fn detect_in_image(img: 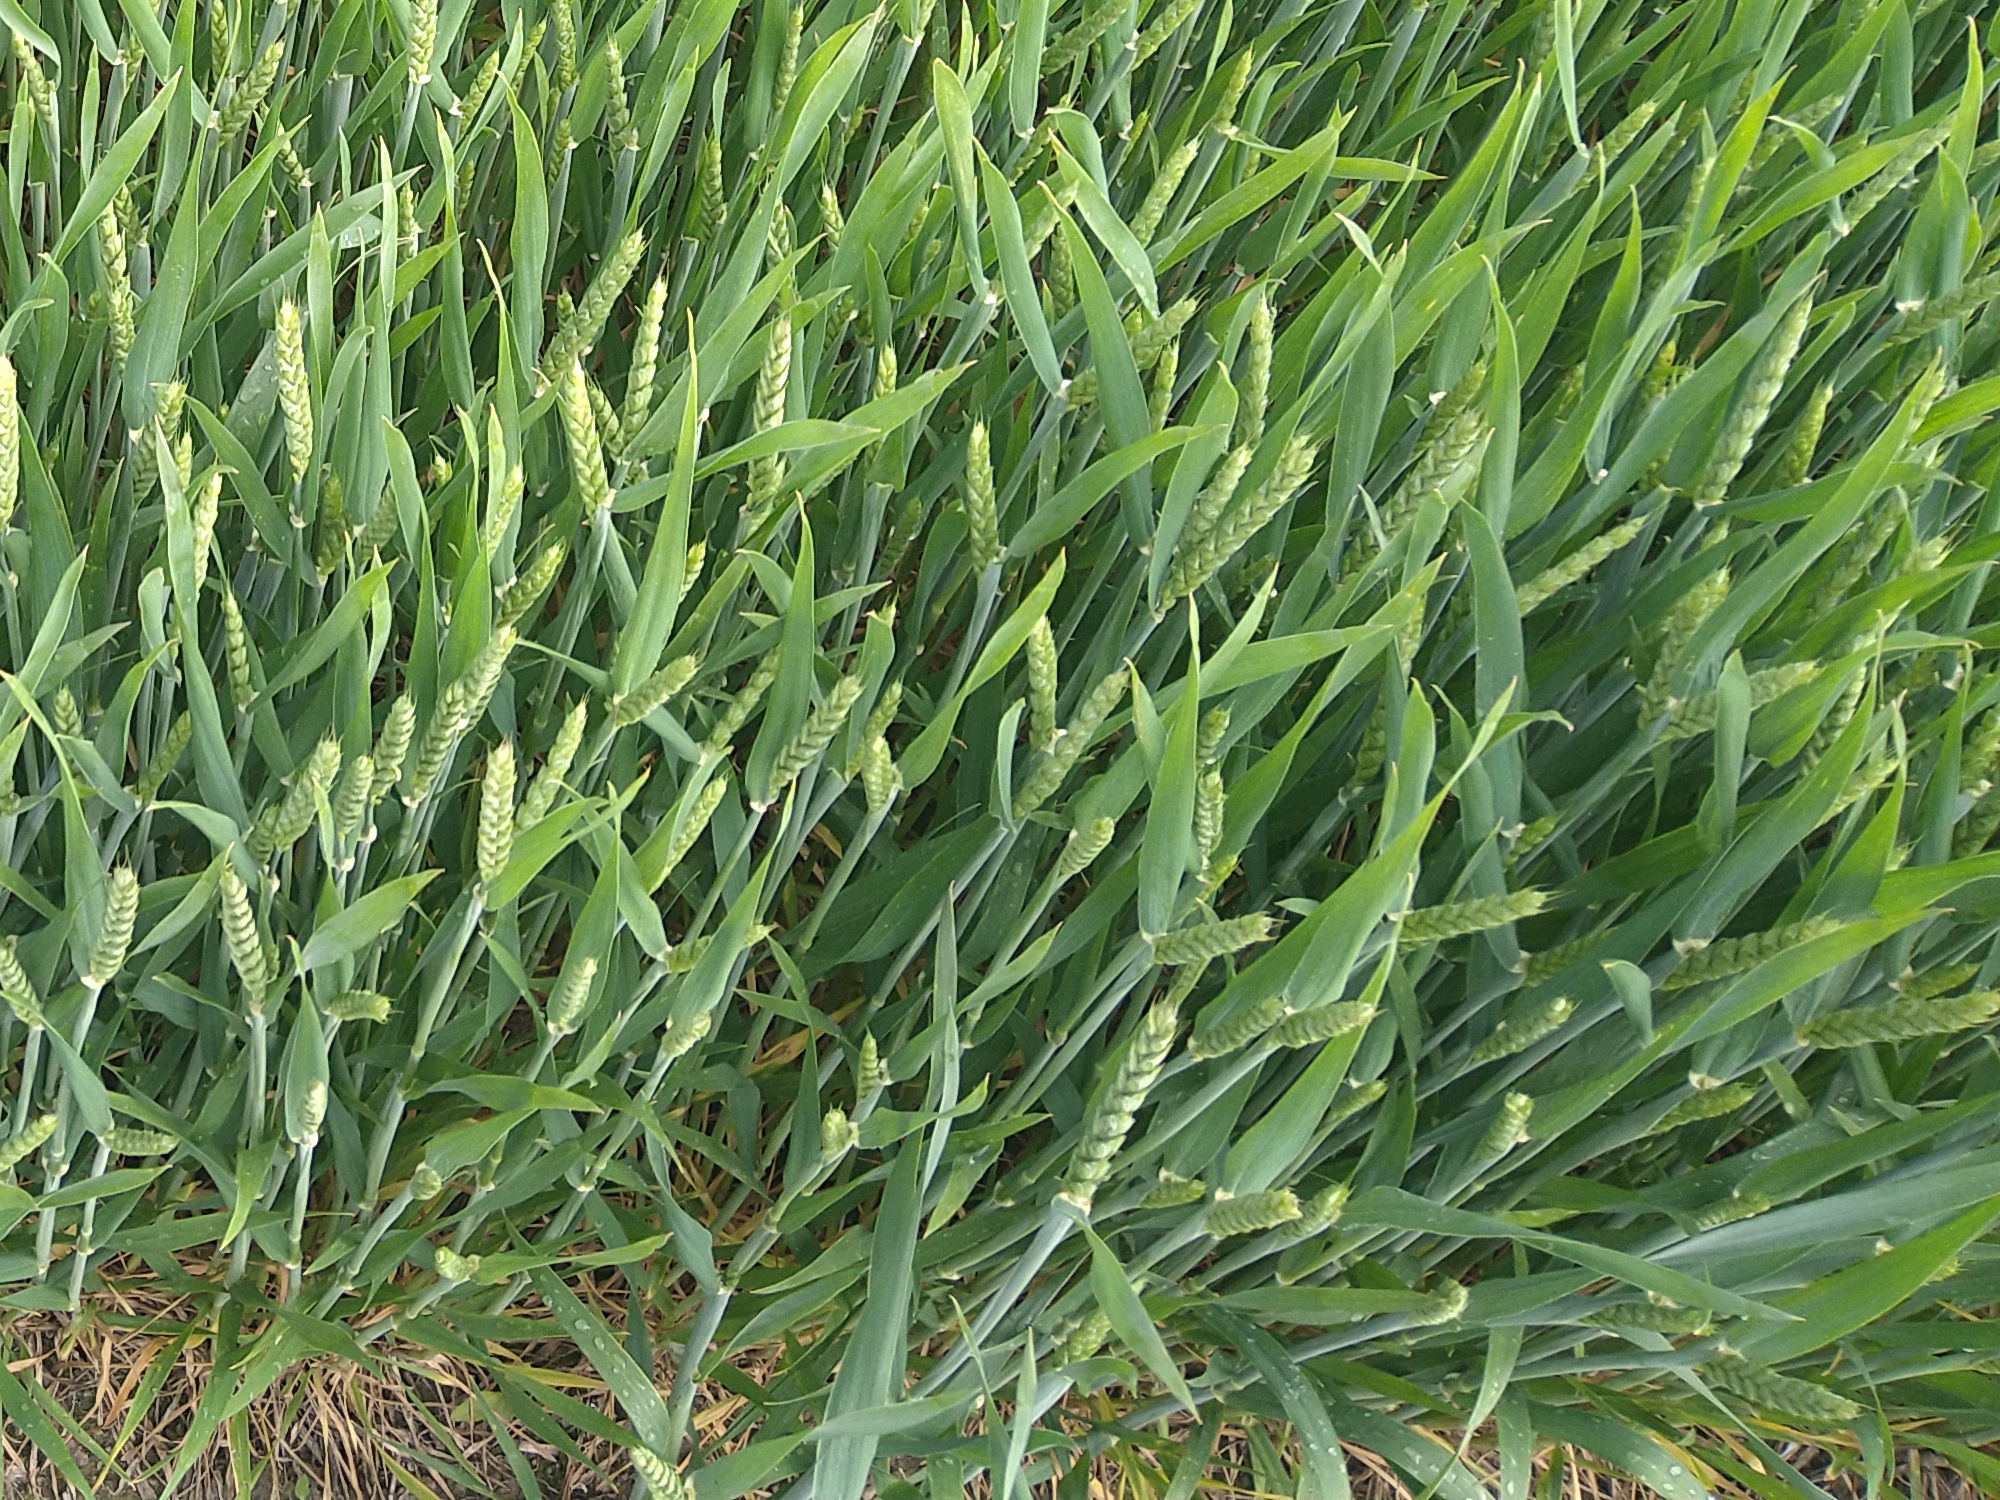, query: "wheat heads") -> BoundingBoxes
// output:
[244,801,282,870]
[817,187,838,247]
[1208,1189,1290,1233]
[193,474,219,604]
[0,1118,60,1195]
[750,324,787,508]
[206,0,226,76]
[97,190,124,285]
[258,210,275,311]
[209,38,282,139]
[876,339,896,404]
[1749,403,1825,504]
[1514,520,1643,617]
[1036,0,1132,72]
[683,143,727,261]
[98,1124,177,1160]
[1151,916,1278,957]
[275,304,311,468]
[257,104,310,183]
[453,155,474,222]
[661,781,725,877]
[142,712,190,792]
[1143,346,1179,429]
[451,48,498,140]
[559,362,606,517]
[1819,439,1939,610]
[1130,0,1220,60]
[1587,1304,1708,1334]
[477,749,514,877]
[1555,353,1594,416]
[820,1110,844,1150]
[540,0,578,91]
[326,763,369,833]
[1438,571,1476,646]
[409,0,439,79]
[1828,131,1943,244]
[8,26,51,127]
[1470,994,1571,1073]
[97,867,140,984]
[1059,1007,1176,1208]
[1419,353,1485,448]
[1695,1202,1762,1230]
[1027,188,1078,254]
[1679,292,1812,499]
[222,598,251,708]
[1807,985,2000,1042]
[1686,1350,1856,1415]
[129,385,184,496]
[0,949,45,1023]
[1185,705,1229,773]
[1216,53,1252,133]
[1580,104,1659,197]
[1355,890,1542,951]
[772,677,863,789]
[1333,406,1465,584]
[509,3,546,91]
[1653,164,1711,289]
[314,468,350,568]
[1644,1080,1752,1135]
[549,949,597,1020]
[1587,337,1676,457]
[1654,664,1819,746]
[549,115,575,185]
[1742,98,1842,171]
[1131,142,1198,247]
[757,194,795,269]
[1042,1310,1111,1369]
[619,655,701,724]
[1790,667,1866,775]
[396,684,472,801]
[1194,997,1280,1052]
[1062,302,1195,396]
[1465,1096,1530,1188]
[304,1070,323,1143]
[1492,810,1556,878]
[1638,533,1726,708]
[1019,670,1127,811]
[369,693,413,801]
[1885,274,2000,339]
[1237,305,1277,450]
[215,870,266,992]
[1844,540,1949,651]
[1345,620,1416,791]
[870,738,902,808]
[486,477,524,553]
[772,2,807,111]
[458,625,517,733]
[353,482,397,562]
[1026,611,1058,759]
[960,415,1001,568]
[1043,222,1077,330]
[177,435,193,486]
[53,683,80,775]
[1953,691,2000,791]
[1173,442,1315,590]
[1520,935,1606,981]
[542,231,647,382]
[1274,1004,1375,1045]
[0,358,15,518]
[123,0,162,79]
[282,743,339,841]
[523,698,587,829]
[622,273,664,442]
[1194,773,1220,852]
[1286,1188,1344,1246]
[1523,0,1562,78]
[1907,369,1946,442]
[581,381,644,483]
[604,45,629,159]
[1949,785,2000,858]
[848,679,902,760]
[852,1027,880,1116]
[99,286,134,374]
[1173,441,1248,553]
[1014,101,1067,191]
[489,541,560,622]
[116,180,140,253]
[1915,143,2000,178]
[1057,810,1115,881]
[821,301,854,359]
[1080,311,1140,419]
[902,200,928,247]
[671,539,706,590]
[706,644,776,753]
[1657,922,1861,985]
[397,177,416,323]
[1526,85,1596,172]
